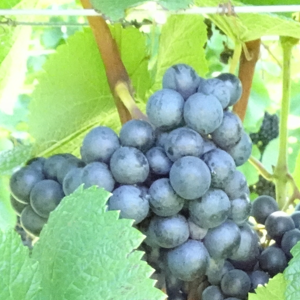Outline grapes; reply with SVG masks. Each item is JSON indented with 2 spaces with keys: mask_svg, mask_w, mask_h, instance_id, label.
Segmentation results:
<instances>
[{
  "mask_svg": "<svg viewBox=\"0 0 300 300\" xmlns=\"http://www.w3.org/2000/svg\"><path fill=\"white\" fill-rule=\"evenodd\" d=\"M146 114L121 125L92 127L80 147L35 156L10 176V203L22 226L40 235L49 214L81 184L113 195L109 211L135 219L139 249L168 300H246L258 284L283 272L300 241V204L289 215L272 197L252 204L235 166L253 142L228 106L243 96L234 74L202 78L177 63Z\"/></svg>",
  "mask_w": 300,
  "mask_h": 300,
  "instance_id": "01657485",
  "label": "grapes"
}]
</instances>
